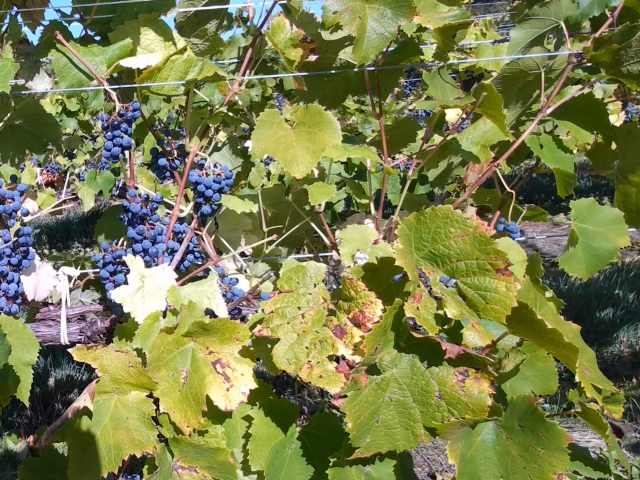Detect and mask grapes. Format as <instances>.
I'll use <instances>...</instances> for the list:
<instances>
[{
  "label": "grapes",
  "mask_w": 640,
  "mask_h": 480,
  "mask_svg": "<svg viewBox=\"0 0 640 480\" xmlns=\"http://www.w3.org/2000/svg\"><path fill=\"white\" fill-rule=\"evenodd\" d=\"M139 192L136 189L128 191L129 198H136L135 203L124 202L121 208L126 213L117 216V220L123 223L127 228L126 235L130 239L131 247L116 248L120 244V240L115 238L111 245L107 242L100 244V249L104 253L101 258L94 255L92 260L98 263L101 272V282L105 285L106 298L110 307V314L113 316H122L123 307L111 298L109 291H113L116 285H123L125 277L129 272L127 267H123L117 262L128 255L134 256L139 254L147 267H156L158 259L163 264L170 262L179 253V248L184 236L189 233V226L185 220L178 219L173 234L176 235L178 241L169 240L166 244V235L168 230L165 227L170 225L166 218L154 212L158 209L159 203L164 201L161 194L154 195L152 201L147 206L140 207L143 203L151 199L149 194H142L137 197Z\"/></svg>",
  "instance_id": "1"
},
{
  "label": "grapes",
  "mask_w": 640,
  "mask_h": 480,
  "mask_svg": "<svg viewBox=\"0 0 640 480\" xmlns=\"http://www.w3.org/2000/svg\"><path fill=\"white\" fill-rule=\"evenodd\" d=\"M35 230L31 226L18 228V240L11 242L12 233L8 228L0 232V276L7 282L0 283V309L5 314H17L20 311L21 296L24 293L20 280L21 270L30 269L31 261L35 259V252L28 248L35 245L33 236Z\"/></svg>",
  "instance_id": "2"
},
{
  "label": "grapes",
  "mask_w": 640,
  "mask_h": 480,
  "mask_svg": "<svg viewBox=\"0 0 640 480\" xmlns=\"http://www.w3.org/2000/svg\"><path fill=\"white\" fill-rule=\"evenodd\" d=\"M197 166L202 168L205 166L207 171L212 168L224 172L225 178L222 174H213L210 178H205L201 175V171L198 168L190 170L188 181L195 187V204L194 211L198 214V218L211 217L215 212L220 210L218 204H206L205 201H209L211 198L215 202L222 200L221 194H227L229 187L234 185V173L230 170L228 165L213 162L211 165L207 164L205 158L200 159L197 162Z\"/></svg>",
  "instance_id": "3"
},
{
  "label": "grapes",
  "mask_w": 640,
  "mask_h": 480,
  "mask_svg": "<svg viewBox=\"0 0 640 480\" xmlns=\"http://www.w3.org/2000/svg\"><path fill=\"white\" fill-rule=\"evenodd\" d=\"M131 111L120 109L118 116L122 119H114L111 122L110 115L108 113H101L99 120L102 123V129L106 131L104 133L102 156L104 158H110L113 163H118L125 158L124 150L133 148V134L132 124L135 119H139L141 104L138 101H132L130 103Z\"/></svg>",
  "instance_id": "4"
},
{
  "label": "grapes",
  "mask_w": 640,
  "mask_h": 480,
  "mask_svg": "<svg viewBox=\"0 0 640 480\" xmlns=\"http://www.w3.org/2000/svg\"><path fill=\"white\" fill-rule=\"evenodd\" d=\"M176 150L178 151V155L174 158L173 162H169L165 159V156L162 151H160L156 147H151L149 149L151 157V162L153 166L151 167V172L157 175V178L161 182H165L168 179L173 180V172H176L179 168V165L188 157V153L185 151V146L183 144H178L176 146Z\"/></svg>",
  "instance_id": "5"
},
{
  "label": "grapes",
  "mask_w": 640,
  "mask_h": 480,
  "mask_svg": "<svg viewBox=\"0 0 640 480\" xmlns=\"http://www.w3.org/2000/svg\"><path fill=\"white\" fill-rule=\"evenodd\" d=\"M29 190L27 183H18L14 190L3 188V180L0 179V197H6L12 200V204L0 205V214L8 215L7 226L14 227L17 223L16 217L21 209V197Z\"/></svg>",
  "instance_id": "6"
},
{
  "label": "grapes",
  "mask_w": 640,
  "mask_h": 480,
  "mask_svg": "<svg viewBox=\"0 0 640 480\" xmlns=\"http://www.w3.org/2000/svg\"><path fill=\"white\" fill-rule=\"evenodd\" d=\"M200 243V240L197 236H192L190 238V243L187 245V254L185 259H181L177 264H176V270L180 273V274H184L188 268L191 266V263L193 262H197V263H201L204 264L206 262L207 256L200 252V250L198 248H195V245H198Z\"/></svg>",
  "instance_id": "7"
},
{
  "label": "grapes",
  "mask_w": 640,
  "mask_h": 480,
  "mask_svg": "<svg viewBox=\"0 0 640 480\" xmlns=\"http://www.w3.org/2000/svg\"><path fill=\"white\" fill-rule=\"evenodd\" d=\"M220 282L225 286H231L229 291L225 293L228 301H237L244 297L245 290L240 287H236V285L239 284V279L237 277H224L223 279H220Z\"/></svg>",
  "instance_id": "8"
},
{
  "label": "grapes",
  "mask_w": 640,
  "mask_h": 480,
  "mask_svg": "<svg viewBox=\"0 0 640 480\" xmlns=\"http://www.w3.org/2000/svg\"><path fill=\"white\" fill-rule=\"evenodd\" d=\"M498 223L499 224L496 225V231L498 233H504L505 231L509 232L511 240H516L518 237L523 236L520 225L515 221H510L508 223L505 217H499Z\"/></svg>",
  "instance_id": "9"
}]
</instances>
